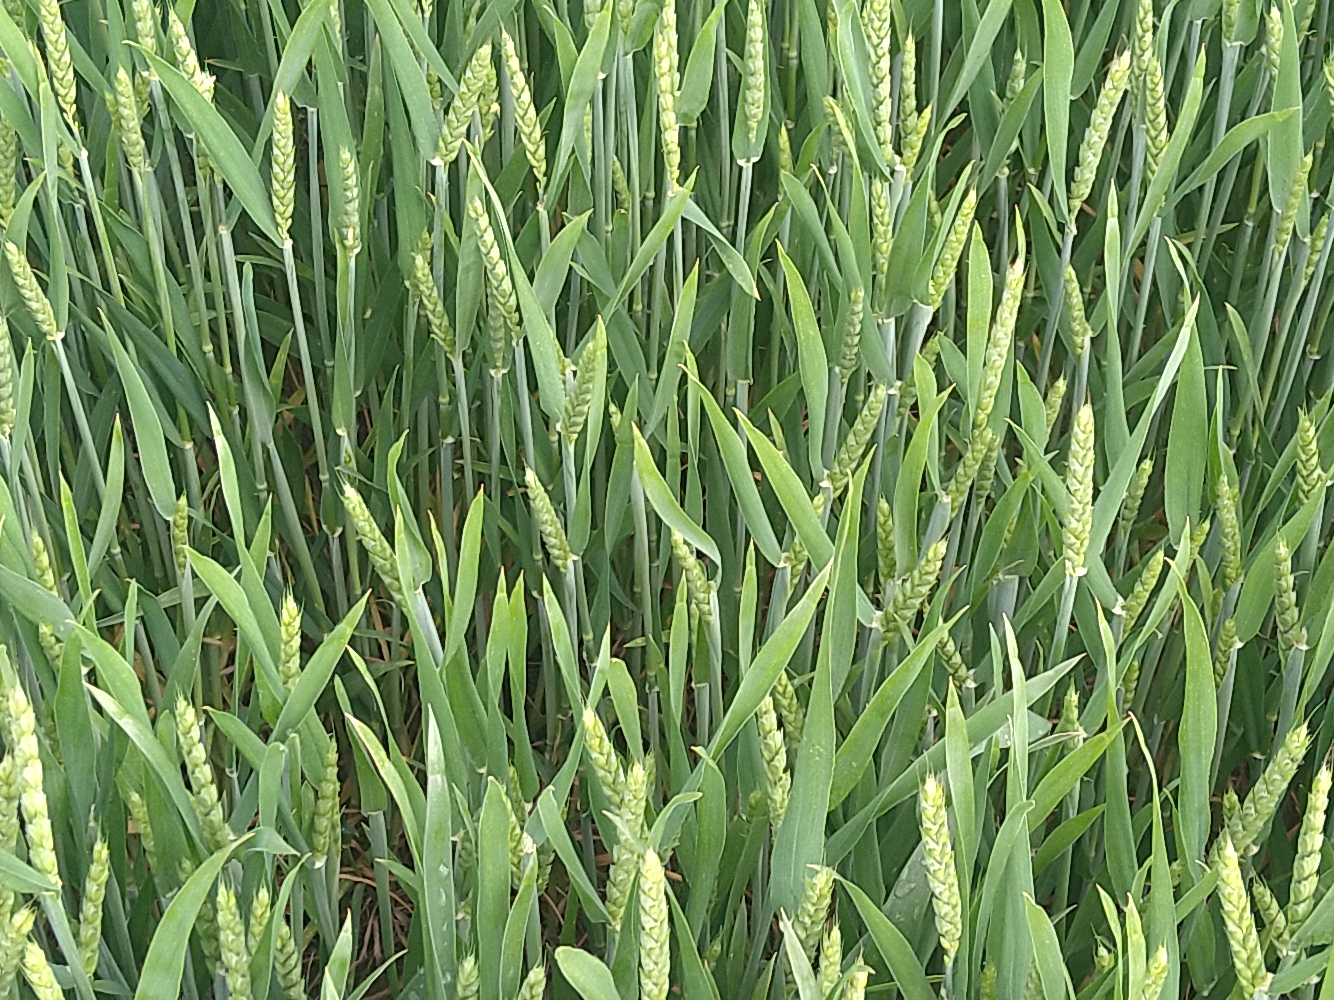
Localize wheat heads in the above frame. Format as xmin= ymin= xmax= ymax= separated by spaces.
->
xmin=76 ymin=841 xmax=111 ymax=972
xmin=920 ymin=776 xmax=961 ymax=962
xmin=508 ymin=966 xmax=548 ymax=1000
xmin=274 ymin=94 xmax=294 ymax=225
xmin=174 ymin=494 xmax=186 ymax=575
xmin=427 ymin=61 xmax=441 ymax=110
xmin=827 ymin=1 xmax=844 ymax=51
xmin=21 ymin=943 xmax=98 ymax=1000
xmin=1273 ymin=544 xmax=1305 ymax=670
xmin=971 ymin=438 xmax=1002 ymax=513
xmin=1046 ymin=380 xmax=1065 ymax=444
xmin=129 ymin=792 xmax=158 ymax=879
xmin=104 ymin=87 xmax=122 ymax=134
xmin=686 ymin=597 xmax=703 ymax=660
xmin=896 ymin=333 xmax=942 ymax=411
xmin=0 ymin=758 xmax=27 ymax=847
xmin=1185 ymin=519 xmax=1210 ymax=566
xmin=981 ymin=270 xmax=1026 ymax=413
xmin=939 ymin=427 xmax=993 ymax=513
xmin=612 ymin=154 xmax=628 ymax=226
xmin=0 ymin=116 xmax=17 ymax=227
xmin=1115 ymin=662 xmax=1141 ymax=714
xmin=1224 ymin=728 xmax=1312 ymax=850
xmin=1222 ymin=788 xmax=1242 ymax=839
xmin=0 ymin=881 xmax=15 ymax=945
xmin=825 ymin=104 xmax=850 ymax=172
xmin=584 ymin=707 xmax=634 ymax=797
xmin=935 ymin=620 xmax=970 ymax=692
xmin=247 ymin=886 xmax=273 ymax=954
xmin=641 ymin=849 xmax=671 ymax=1000
xmin=1250 ymin=878 xmax=1292 ymax=957
xmin=584 ymin=100 xmax=590 ymax=160
xmin=524 ymin=469 xmax=567 ymax=570
xmin=180 ymin=858 xmax=223 ymax=980
xmin=272 ymin=917 xmax=307 ymax=1000
xmin=6 ymin=242 xmax=58 ymax=332
xmin=875 ymin=540 xmax=944 ymax=658
xmin=123 ymin=0 xmax=161 ymax=37
xmin=201 ymin=76 xmax=218 ymax=178
xmin=19 ymin=670 xmax=59 ymax=892
xmin=0 ymin=909 xmax=38 ymax=1000
xmin=1193 ymin=591 xmax=1226 ymax=625
xmin=1267 ymin=4 xmax=1285 ymax=109
xmin=1107 ymin=549 xmax=1163 ymax=647
xmin=310 ymin=743 xmax=340 ymax=859
xmin=545 ymin=360 xmax=576 ymax=441
xmin=743 ymin=0 xmax=764 ymax=139
xmin=1054 ymin=690 xmax=1081 ymax=732
xmin=893 ymin=37 xmax=915 ymax=147
xmin=1131 ymin=0 xmax=1154 ymax=116
xmin=1295 ymin=416 xmax=1318 ymax=510
xmin=333 ymin=775 xmax=343 ymax=842
xmin=775 ymin=121 xmax=787 ymax=204
xmin=836 ymin=391 xmax=887 ymax=494
xmin=510 ymin=767 xmax=527 ymax=830
xmin=877 ymin=496 xmax=911 ymax=575
xmin=657 ymin=0 xmax=683 ymax=188
xmin=670 ymin=529 xmax=717 ymax=629
xmin=0 ymin=310 xmax=16 ymax=441
xmin=1121 ymin=460 xmax=1153 ymax=535
xmin=609 ymin=768 xmax=650 ymax=941
xmin=411 ymin=250 xmax=454 ymax=353
xmin=560 ymin=343 xmax=603 ymax=437
xmin=1147 ymin=55 xmax=1168 ymax=194
xmin=1219 ymin=0 xmax=1242 ymax=42
xmin=1209 ymin=621 xmax=1240 ymax=682
xmin=756 ymin=695 xmax=788 ymax=836
xmin=773 ymin=669 xmax=806 ymax=763
xmin=852 ymin=0 xmax=888 ymax=143
xmin=838 ymin=291 xmax=861 ymax=363
xmin=981 ymin=961 xmax=997 ymax=1000
xmin=454 ymin=953 xmax=483 ymax=1000
xmin=173 ymin=696 xmax=236 ymax=848
xmin=441 ymin=42 xmax=493 ymax=160
xmin=1004 ymin=53 xmax=1027 ymax=109
xmin=1077 ymin=952 xmax=1117 ymax=1000
xmin=279 ymin=592 xmax=299 ymax=682
xmin=0 ymin=0 xmax=24 ymax=27
xmin=1063 ymin=265 xmax=1081 ymax=363
xmin=1309 ymin=216 xmax=1331 ymax=282
xmin=474 ymin=70 xmax=499 ymax=134
xmin=341 ymin=482 xmax=405 ymax=608
xmin=0 ymin=649 xmax=11 ymax=754
xmin=405 ymin=226 xmax=434 ymax=303
xmin=998 ymin=499 xmax=1022 ymax=555
xmin=1287 ymin=766 xmax=1332 ymax=932
xmin=1208 ymin=829 xmax=1266 ymax=1000
xmin=1071 ymin=53 xmax=1130 ymax=208
xmin=465 ymin=0 xmax=488 ymax=31
xmin=1276 ymin=156 xmax=1310 ymax=259
xmin=789 ymin=496 xmax=825 ymax=587
xmin=875 ymin=181 xmax=898 ymax=291
xmin=170 ymin=9 xmax=195 ymax=88
xmin=817 ymin=928 xmax=843 ymax=1000
xmin=639 ymin=752 xmax=655 ymax=791
xmin=38 ymin=629 xmax=63 ymax=680
xmin=514 ymin=812 xmax=561 ymax=882
xmin=36 ymin=0 xmax=75 ymax=120
xmin=501 ymin=31 xmax=548 ymax=181
xmin=340 ymin=144 xmax=361 ymax=250
xmin=1005 ymin=957 xmax=1046 ymax=1000
xmin=128 ymin=862 xmax=146 ymax=921
xmin=932 ymin=190 xmax=976 ymax=300
xmin=781 ymin=872 xmax=835 ymax=996
xmin=467 ymin=197 xmax=520 ymax=322
xmin=908 ymin=107 xmax=932 ymax=173
xmin=830 ymin=958 xmax=867 ymax=1000
xmin=1122 ymin=948 xmax=1171 ymax=1000
xmin=443 ymin=814 xmax=484 ymax=900
xmin=1063 ymin=408 xmax=1094 ymax=573
xmin=115 ymin=66 xmax=145 ymax=165
xmin=28 ymin=530 xmax=56 ymax=599
xmin=488 ymin=280 xmax=505 ymax=364
xmin=1215 ymin=479 xmax=1236 ymax=592
xmin=215 ymin=886 xmax=253 ymax=1000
